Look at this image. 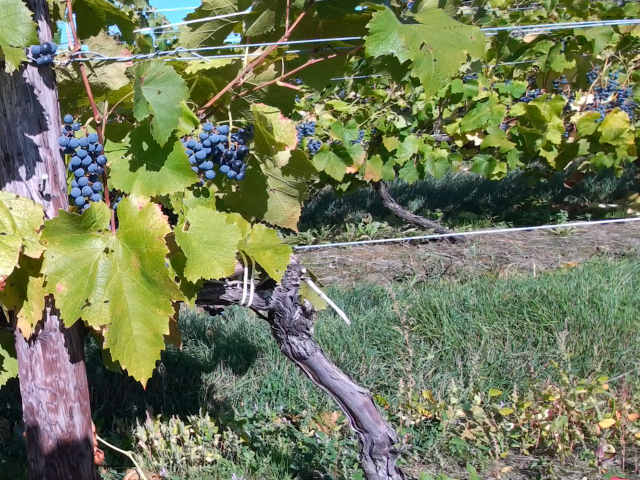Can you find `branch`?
<instances>
[{
  "instance_id": "30e6481e",
  "label": "branch",
  "mask_w": 640,
  "mask_h": 480,
  "mask_svg": "<svg viewBox=\"0 0 640 480\" xmlns=\"http://www.w3.org/2000/svg\"><path fill=\"white\" fill-rule=\"evenodd\" d=\"M360 50L359 46L354 47L351 50L348 51H341V52H335L333 54H328V55H320L318 57H315L303 64H300L296 67H294L293 69L289 70L288 72L284 73L282 76L274 78L273 80H268L265 83L256 85L255 87H252L248 90L245 91H239L238 93L234 94L231 96V100L235 101L236 99L240 98L241 96H247L250 95L252 93H255L259 90H262L264 88H267L270 85H275L279 82L285 81L288 77L292 76L293 74H295L296 72L302 70V69H306L309 66L314 65L317 62H320L322 60H330V59H335L337 57H347V56H351L353 54H355L356 52H358Z\"/></svg>"
},
{
  "instance_id": "325d2c04",
  "label": "branch",
  "mask_w": 640,
  "mask_h": 480,
  "mask_svg": "<svg viewBox=\"0 0 640 480\" xmlns=\"http://www.w3.org/2000/svg\"><path fill=\"white\" fill-rule=\"evenodd\" d=\"M277 49V45H272L266 52H264L260 57H258L254 62H252L251 64H249L248 66H246L243 70H241L237 76L229 83V85L227 87H225L223 90H221L219 93H217L214 97L210 98L207 102L204 103V106L200 107L197 111H196V115L200 116L201 113L210 110L213 106L214 103L220 99L222 96H224L226 93H228L231 89L234 88V86L241 80V78L248 73L250 70H252L254 67H256L257 65H259L263 60L266 59V57L270 56L275 50ZM224 107L223 103H219L218 106H216L214 109L210 110L208 113H206L201 119L200 122L204 123L206 122L210 117H212L213 115H215L217 112H219L222 108Z\"/></svg>"
},
{
  "instance_id": "170604dd",
  "label": "branch",
  "mask_w": 640,
  "mask_h": 480,
  "mask_svg": "<svg viewBox=\"0 0 640 480\" xmlns=\"http://www.w3.org/2000/svg\"><path fill=\"white\" fill-rule=\"evenodd\" d=\"M78 69H79L80 74H81V76L83 78L84 88H85L87 94L89 95L92 113H93L94 118L96 120L98 143L102 144L103 143V134H102L101 118H100V115H99L98 110L96 108L95 96H94V93L92 92V90H91V88L89 86V79H88V75L86 74L85 69L83 67V62L78 63Z\"/></svg>"
},
{
  "instance_id": "45aa463d",
  "label": "branch",
  "mask_w": 640,
  "mask_h": 480,
  "mask_svg": "<svg viewBox=\"0 0 640 480\" xmlns=\"http://www.w3.org/2000/svg\"><path fill=\"white\" fill-rule=\"evenodd\" d=\"M67 16L69 19V23H70V28L72 30V33L74 34V49L76 51H80L81 47L79 46V41H80V36H79V32L76 28L75 25V21H74V16L72 14V1L68 0L67 1Z\"/></svg>"
},
{
  "instance_id": "982ccf7c",
  "label": "branch",
  "mask_w": 640,
  "mask_h": 480,
  "mask_svg": "<svg viewBox=\"0 0 640 480\" xmlns=\"http://www.w3.org/2000/svg\"><path fill=\"white\" fill-rule=\"evenodd\" d=\"M315 2V0H308L305 5L303 6L302 10L297 14L295 20L293 21V23L288 27V29L284 32L283 35H281L278 39H286L289 34L294 30V28L297 27L298 23L300 22L301 18L305 15V13L307 12L308 8Z\"/></svg>"
}]
</instances>
